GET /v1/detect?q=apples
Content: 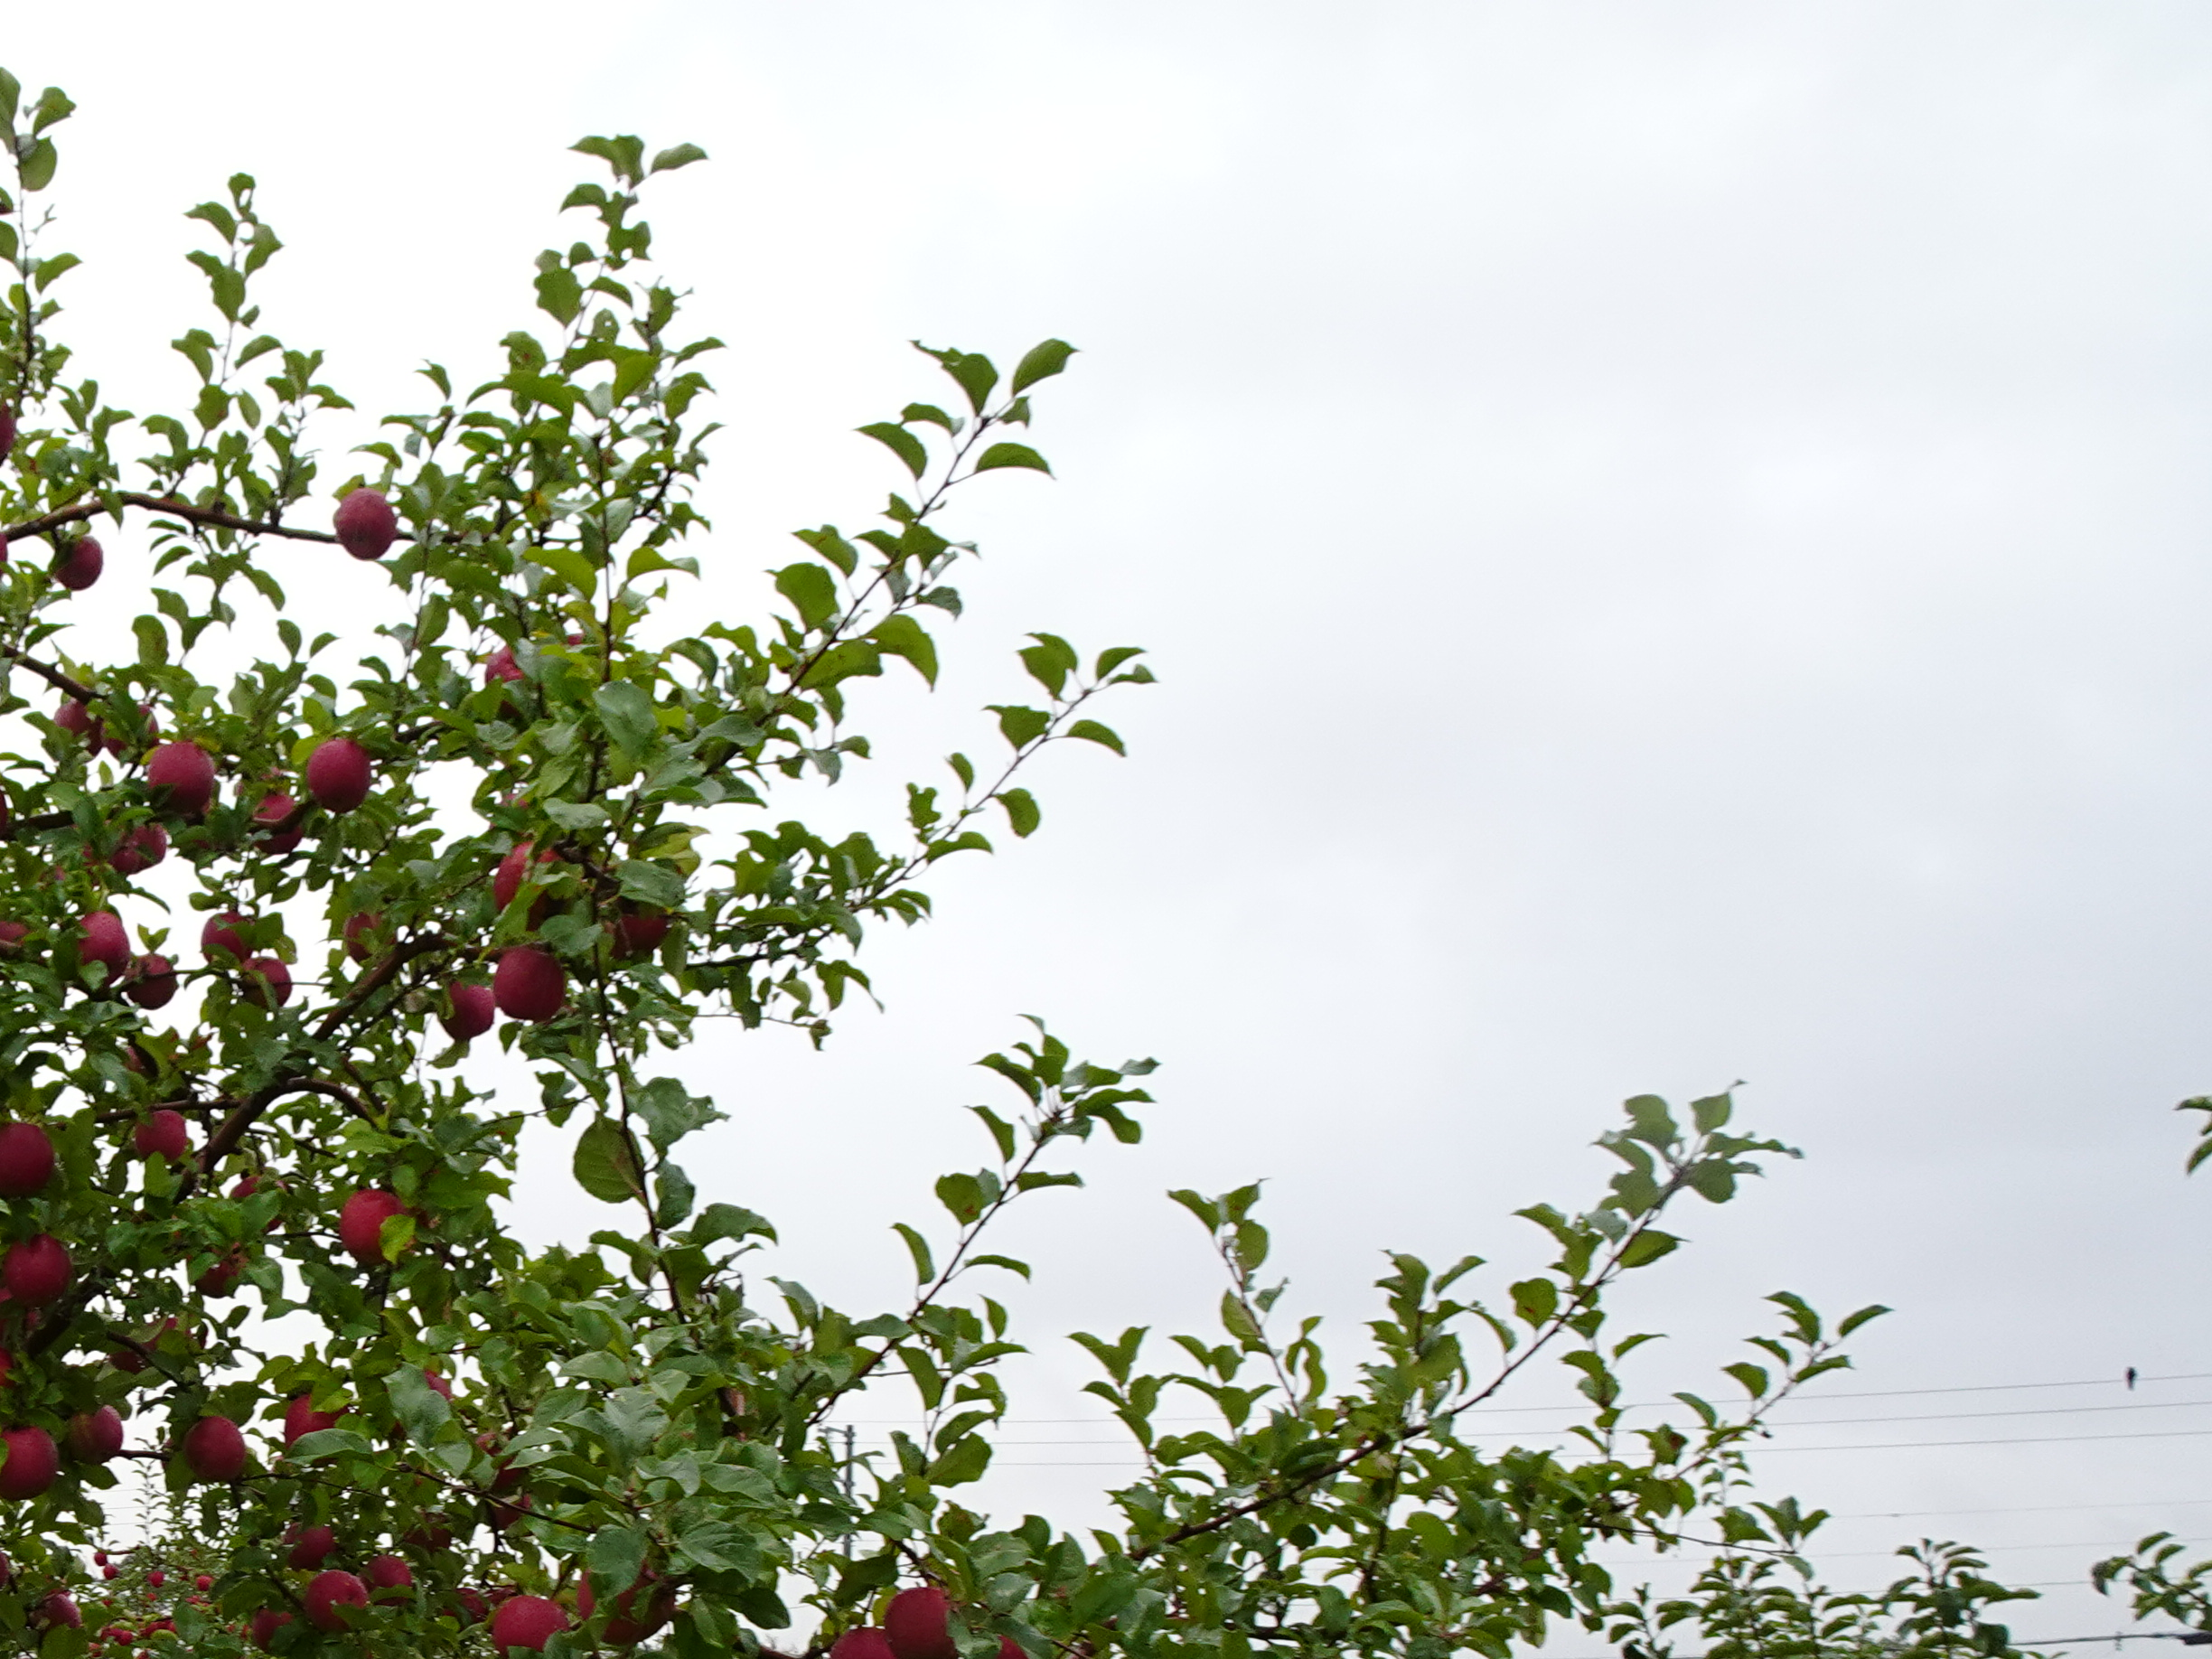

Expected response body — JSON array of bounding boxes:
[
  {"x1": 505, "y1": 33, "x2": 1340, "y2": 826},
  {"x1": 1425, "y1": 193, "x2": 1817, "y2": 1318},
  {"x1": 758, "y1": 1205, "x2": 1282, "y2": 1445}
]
[
  {"x1": 44, "y1": 1573, "x2": 72, "y2": 1597},
  {"x1": 0, "y1": 590, "x2": 91, "y2": 695},
  {"x1": 106, "y1": 705, "x2": 159, "y2": 763},
  {"x1": 884, "y1": 1588, "x2": 958, "y2": 1659},
  {"x1": 493, "y1": 947, "x2": 564, "y2": 1021},
  {"x1": 107, "y1": 833, "x2": 143, "y2": 874},
  {"x1": 148, "y1": 743, "x2": 214, "y2": 814},
  {"x1": 392, "y1": 1370, "x2": 450, "y2": 1434},
  {"x1": 136, "y1": 1110, "x2": 186, "y2": 1164},
  {"x1": 971, "y1": 1635, "x2": 1042, "y2": 1659},
  {"x1": 284, "y1": 1522, "x2": 335, "y2": 1572},
  {"x1": 0, "y1": 1123, "x2": 54, "y2": 1195},
  {"x1": 333, "y1": 488, "x2": 395, "y2": 559},
  {"x1": 0, "y1": 1287, "x2": 36, "y2": 1341},
  {"x1": 490, "y1": 1491, "x2": 530, "y2": 1528},
  {"x1": 492, "y1": 1595, "x2": 569, "y2": 1659},
  {"x1": 54, "y1": 702, "x2": 105, "y2": 763},
  {"x1": 285, "y1": 1395, "x2": 349, "y2": 1462},
  {"x1": 147, "y1": 1318, "x2": 191, "y2": 1342},
  {"x1": 827, "y1": 1627, "x2": 907, "y2": 1659},
  {"x1": 80, "y1": 911, "x2": 130, "y2": 986},
  {"x1": 230, "y1": 1174, "x2": 287, "y2": 1232},
  {"x1": 567, "y1": 634, "x2": 584, "y2": 647},
  {"x1": 125, "y1": 1047, "x2": 178, "y2": 1073},
  {"x1": 64, "y1": 1405, "x2": 123, "y2": 1465},
  {"x1": 56, "y1": 824, "x2": 114, "y2": 885},
  {"x1": 305, "y1": 1569, "x2": 366, "y2": 1630},
  {"x1": 309, "y1": 741, "x2": 371, "y2": 813},
  {"x1": 127, "y1": 957, "x2": 176, "y2": 1009},
  {"x1": 232, "y1": 757, "x2": 290, "y2": 803},
  {"x1": 201, "y1": 912, "x2": 253, "y2": 969},
  {"x1": 183, "y1": 1417, "x2": 245, "y2": 1481},
  {"x1": 443, "y1": 1587, "x2": 489, "y2": 1625},
  {"x1": 339, "y1": 1188, "x2": 410, "y2": 1263},
  {"x1": 362, "y1": 1554, "x2": 411, "y2": 1606},
  {"x1": 0, "y1": 395, "x2": 16, "y2": 463},
  {"x1": 2, "y1": 1232, "x2": 72, "y2": 1308},
  {"x1": 579, "y1": 1557, "x2": 675, "y2": 1645},
  {"x1": 245, "y1": 957, "x2": 291, "y2": 1006},
  {"x1": 30, "y1": 1595, "x2": 81, "y2": 1631},
  {"x1": 54, "y1": 539, "x2": 103, "y2": 590},
  {"x1": 607, "y1": 913, "x2": 668, "y2": 957},
  {"x1": 0, "y1": 920, "x2": 28, "y2": 970},
  {"x1": 158, "y1": 1437, "x2": 196, "y2": 1485},
  {"x1": 490, "y1": 794, "x2": 529, "y2": 829},
  {"x1": 404, "y1": 1513, "x2": 452, "y2": 1556},
  {"x1": 347, "y1": 912, "x2": 397, "y2": 966},
  {"x1": 475, "y1": 1435, "x2": 522, "y2": 1487},
  {"x1": 0, "y1": 1425, "x2": 59, "y2": 1501},
  {"x1": 254, "y1": 793, "x2": 304, "y2": 854},
  {"x1": 109, "y1": 1339, "x2": 154, "y2": 1375},
  {"x1": 254, "y1": 1609, "x2": 287, "y2": 1654},
  {"x1": 437, "y1": 980, "x2": 494, "y2": 1038},
  {"x1": 483, "y1": 1586, "x2": 517, "y2": 1606},
  {"x1": 131, "y1": 823, "x2": 166, "y2": 873},
  {"x1": 495, "y1": 841, "x2": 566, "y2": 931},
  {"x1": 485, "y1": 644, "x2": 524, "y2": 684},
  {"x1": 195, "y1": 1259, "x2": 236, "y2": 1298}
]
